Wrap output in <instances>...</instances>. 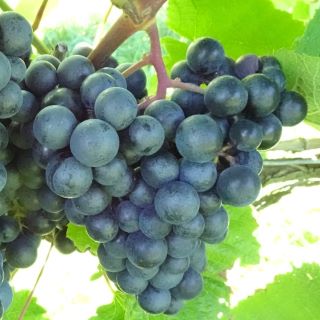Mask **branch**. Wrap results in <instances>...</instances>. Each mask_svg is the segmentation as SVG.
Here are the masks:
<instances>
[{"label":"branch","instance_id":"30e6481e","mask_svg":"<svg viewBox=\"0 0 320 320\" xmlns=\"http://www.w3.org/2000/svg\"><path fill=\"white\" fill-rule=\"evenodd\" d=\"M123 13L112 28L88 54L95 71L104 67L112 52L132 34L145 27L157 14L166 0H111Z\"/></svg>","mask_w":320,"mask_h":320}]
</instances>
